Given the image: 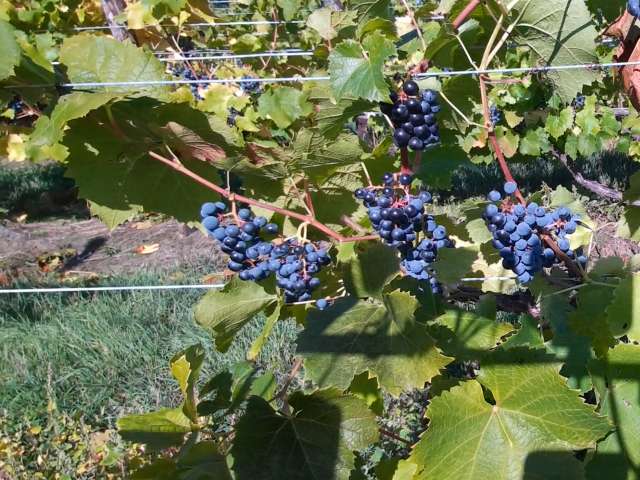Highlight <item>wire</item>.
Wrapping results in <instances>:
<instances>
[{"label": "wire", "mask_w": 640, "mask_h": 480, "mask_svg": "<svg viewBox=\"0 0 640 480\" xmlns=\"http://www.w3.org/2000/svg\"><path fill=\"white\" fill-rule=\"evenodd\" d=\"M330 80H331L330 76H322V77H247L244 79L212 78L208 80H160V81H137V82L96 81L95 83H84V82H59V83H51V84L17 83V84H0V89H19V88L53 89V88H62V87L106 89L107 87L210 85L214 83L246 84L249 82H324V81H330Z\"/></svg>", "instance_id": "1"}, {"label": "wire", "mask_w": 640, "mask_h": 480, "mask_svg": "<svg viewBox=\"0 0 640 480\" xmlns=\"http://www.w3.org/2000/svg\"><path fill=\"white\" fill-rule=\"evenodd\" d=\"M610 67H640V62H607L600 65H552V66H540V67H519V68H498L482 71H449V72H413V71H400L387 73V78H396L403 76L411 77H432L443 78L451 76H480V75H493L500 73H522V72H542V71H554V70H603Z\"/></svg>", "instance_id": "2"}, {"label": "wire", "mask_w": 640, "mask_h": 480, "mask_svg": "<svg viewBox=\"0 0 640 480\" xmlns=\"http://www.w3.org/2000/svg\"><path fill=\"white\" fill-rule=\"evenodd\" d=\"M226 284H203V285H141V286H124V287H107V286H85V287H39L36 289H16L12 287L0 288V293L14 294H39L41 292L65 293V294H94L104 292H126V291H143V290H168V291H199L208 289H226Z\"/></svg>", "instance_id": "3"}]
</instances>
